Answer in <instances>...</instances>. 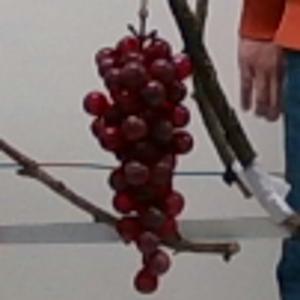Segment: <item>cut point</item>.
<instances>
[{"label":"cut point","instance_id":"6a23745f","mask_svg":"<svg viewBox=\"0 0 300 300\" xmlns=\"http://www.w3.org/2000/svg\"><path fill=\"white\" fill-rule=\"evenodd\" d=\"M152 10L150 0H139V8L136 10V18H138L139 33L136 39L139 40L141 46L147 41V20L151 17Z\"/></svg>","mask_w":300,"mask_h":300}]
</instances>
